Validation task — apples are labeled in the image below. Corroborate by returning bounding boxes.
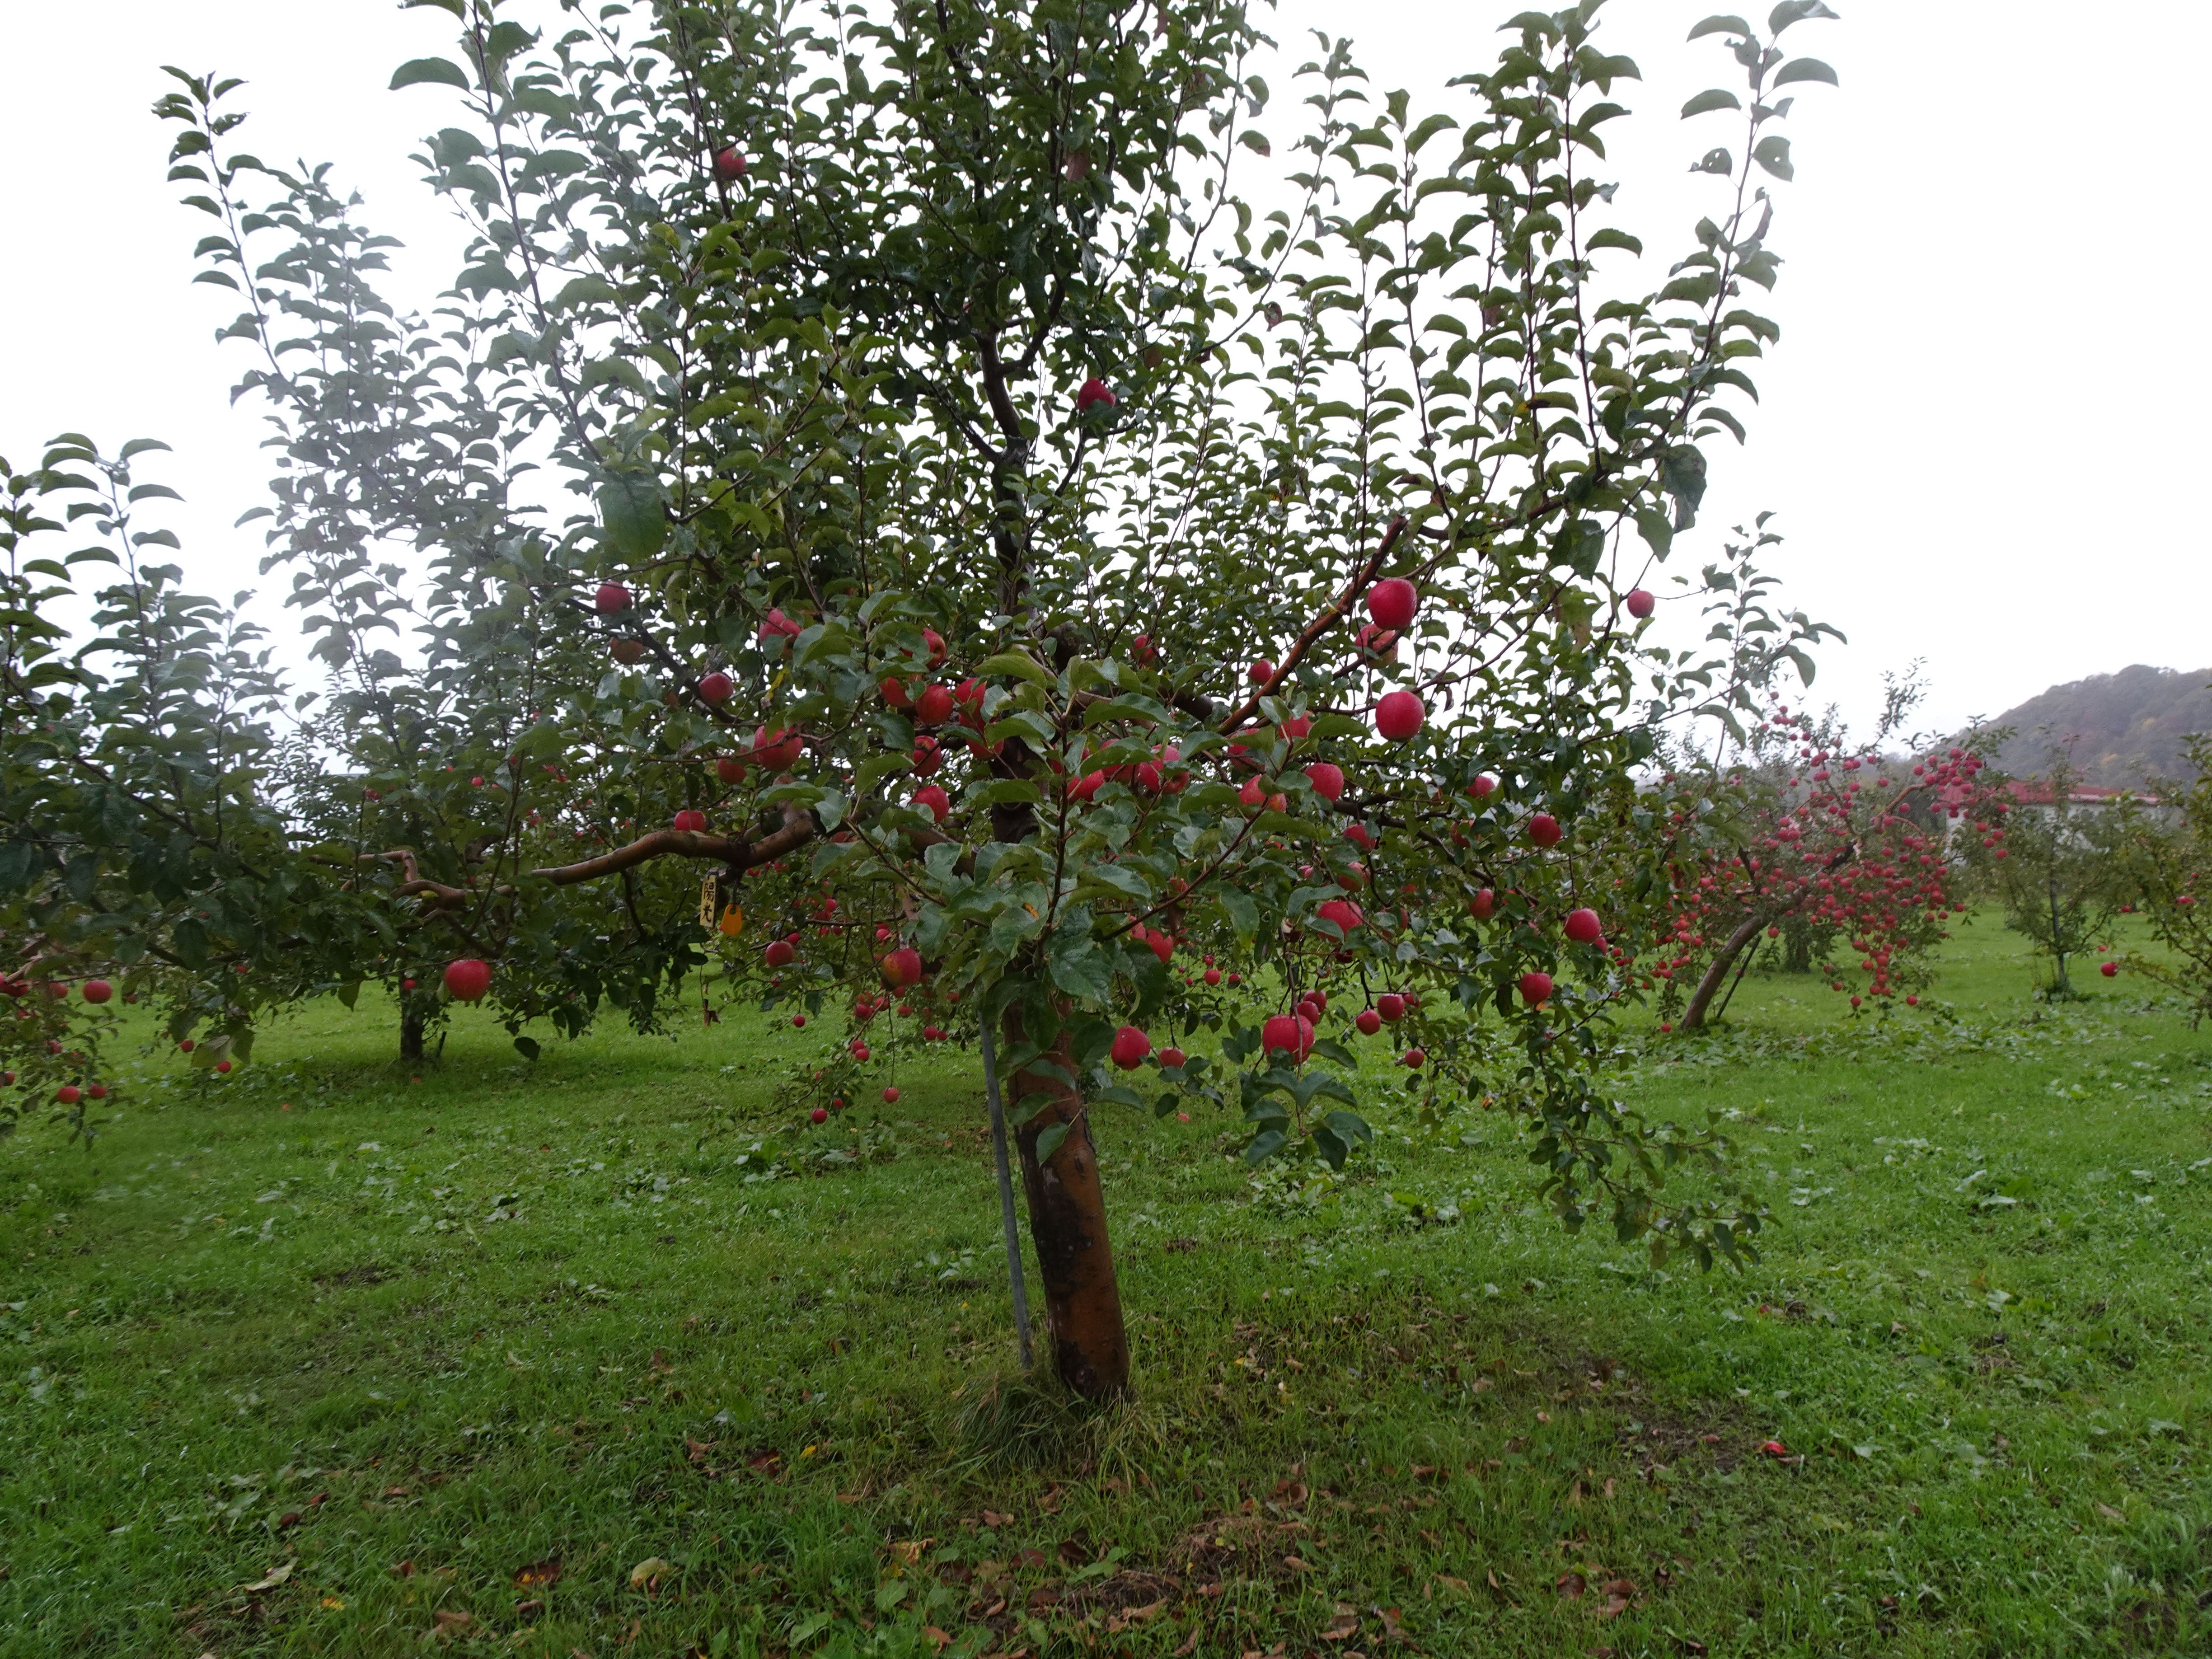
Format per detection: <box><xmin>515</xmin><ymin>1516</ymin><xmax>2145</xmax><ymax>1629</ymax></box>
<box><xmin>1565</xmin><ymin>908</ymin><xmax>1603</xmax><ymax>944</ymax></box>
<box><xmin>1626</xmin><ymin>588</ymin><xmax>1654</xmax><ymax>618</ymax></box>
<box><xmin>607</xmin><ymin>631</ymin><xmax>649</xmax><ymax>666</ymax></box>
<box><xmin>1098</xmin><ymin>732</ymin><xmax>1133</xmax><ymax>789</ymax></box>
<box><xmin>816</xmin><ymin>892</ymin><xmax>842</xmax><ymax>921</ymax></box>
<box><xmin>1139</xmin><ymin>925</ymin><xmax>1175</xmax><ymax>966</ymax></box>
<box><xmin>849</xmin><ymin>1039</ymin><xmax>867</xmax><ymax>1059</ymax></box>
<box><xmin>1467</xmin><ymin>883</ymin><xmax>1501</xmax><ymax>924</ymax></box>
<box><xmin>830</xmin><ymin>827</ymin><xmax>861</xmax><ymax>856</ymax></box>
<box><xmin>784</xmin><ymin>926</ymin><xmax>802</xmax><ymax>950</ymax></box>
<box><xmin>1113</xmin><ymin>851</ymin><xmax>1145</xmax><ymax>879</ymax></box>
<box><xmin>1246</xmin><ymin>655</ymin><xmax>1279</xmax><ymax>690</ymax></box>
<box><xmin>1527</xmin><ymin>812</ymin><xmax>1567</xmax><ymax>850</ymax></box>
<box><xmin>673</xmin><ymin>807</ymin><xmax>708</xmax><ymax>831</ymax></box>
<box><xmin>933</xmin><ymin>1029</ymin><xmax>954</xmax><ymax>1045</ymax></box>
<box><xmin>1200</xmin><ymin>950</ymin><xmax>1218</xmax><ymax>970</ymax></box>
<box><xmin>1177</xmin><ymin>1111</ymin><xmax>1191</xmax><ymax>1127</ymax></box>
<box><xmin>909</xmin><ymin>780</ymin><xmax>949</xmax><ymax>824</ymax></box>
<box><xmin>963</xmin><ymin>720</ymin><xmax>1006</xmax><ymax>764</ymax></box>
<box><xmin>444</xmin><ymin>956</ymin><xmax>494</xmax><ymax>1003</ymax></box>
<box><xmin>1293</xmin><ymin>998</ymin><xmax>1322</xmax><ymax>1030</ymax></box>
<box><xmin>1405</xmin><ymin>1047</ymin><xmax>1425</xmax><ymax>1071</ymax></box>
<box><xmin>773</xmin><ymin>856</ymin><xmax>792</xmax><ymax>876</ymax></box>
<box><xmin>851</xmin><ymin>986</ymin><xmax>874</xmax><ymax>1009</ymax></box>
<box><xmin>1353</xmin><ymin>1010</ymin><xmax>1381</xmax><ymax>1038</ymax></box>
<box><xmin>714</xmin><ymin>145</ymin><xmax>746</xmax><ymax>181</ymax></box>
<box><xmin>1202</xmin><ymin>967</ymin><xmax>1224</xmax><ymax>988</ymax></box>
<box><xmin>1331</xmin><ymin>860</ymin><xmax>1377</xmax><ymax>892</ymax></box>
<box><xmin>1340</xmin><ymin>820</ymin><xmax>1380</xmax><ymax>859</ymax></box>
<box><xmin>1401</xmin><ymin>876</ymin><xmax>1423</xmax><ymax>898</ymax></box>
<box><xmin>898</xmin><ymin>733</ymin><xmax>945</xmax><ymax>779</ymax></box>
<box><xmin>853</xmin><ymin>1049</ymin><xmax>869</xmax><ymax>1065</ymax></box>
<box><xmin>595</xmin><ymin>579</ymin><xmax>637</xmax><ymax>620</ymax></box>
<box><xmin>941</xmin><ymin>987</ymin><xmax>963</xmax><ymax>1007</ymax></box>
<box><xmin>1155</xmin><ymin>874</ymin><xmax>1192</xmax><ymax>907</ymax></box>
<box><xmin>1177</xmin><ymin>963</ymin><xmax>1191</xmax><ymax>977</ymax></box>
<box><xmin>1367</xmin><ymin>576</ymin><xmax>1419</xmax><ymax>633</ymax></box>
<box><xmin>1496</xmin><ymin>888</ymin><xmax>1523</xmax><ymax>915</ymax></box>
<box><xmin>760</xmin><ymin>915</ymin><xmax>777</xmax><ymax>935</ymax></box>
<box><xmin>1285</xmin><ymin>913</ymin><xmax>1303</xmax><ymax>929</ymax></box>
<box><xmin>1047</xmin><ymin>729</ymin><xmax>1092</xmax><ymax>780</ymax></box>
<box><xmin>879</xmin><ymin>946</ymin><xmax>926</xmax><ymax>992</ymax></box>
<box><xmin>1374</xmin><ymin>689</ymin><xmax>1427</xmax><ymax>747</ymax></box>
<box><xmin>809</xmin><ymin>1069</ymin><xmax>829</xmax><ymax>1084</ymax></box>
<box><xmin>808</xmin><ymin>1104</ymin><xmax>829</xmax><ymax>1128</ymax></box>
<box><xmin>837</xmin><ymin>579</ymin><xmax>856</xmax><ymax>604</ymax></box>
<box><xmin>1074</xmin><ymin>375</ymin><xmax>1120</xmax><ymax>424</ymax></box>
<box><xmin>1609</xmin><ymin>989</ymin><xmax>1622</xmax><ymax>999</ymax></box>
<box><xmin>832</xmin><ymin>1089</ymin><xmax>853</xmax><ymax>1109</ymax></box>
<box><xmin>1063</xmin><ymin>764</ymin><xmax>1108</xmax><ymax>808</ymax></box>
<box><xmin>829</xmin><ymin>922</ymin><xmax>845</xmax><ymax>936</ymax></box>
<box><xmin>789</xmin><ymin>1013</ymin><xmax>805</xmax><ymax>1028</ymax></box>
<box><xmin>1226</xmin><ymin>970</ymin><xmax>1247</xmax><ymax>990</ymax></box>
<box><xmin>715</xmin><ymin>744</ymin><xmax>751</xmax><ymax>787</ymax></box>
<box><xmin>1237</xmin><ymin>774</ymin><xmax>1290</xmax><ymax>824</ymax></box>
<box><xmin>752</xmin><ymin>722</ymin><xmax>805</xmax><ymax>773</ymax></box>
<box><xmin>1447</xmin><ymin>817</ymin><xmax>1498</xmax><ymax>849</ymax></box>
<box><xmin>1391</xmin><ymin>989</ymin><xmax>1418</xmax><ymax>1015</ymax></box>
<box><xmin>1376</xmin><ymin>991</ymin><xmax>1405</xmax><ymax>1022</ymax></box>
<box><xmin>1298</xmin><ymin>761</ymin><xmax>1346</xmax><ymax>809</ymax></box>
<box><xmin>1106</xmin><ymin>1024</ymin><xmax>1153</xmax><ymax>1074</ymax></box>
<box><xmin>1137</xmin><ymin>743</ymin><xmax>1192</xmax><ymax>796</ymax></box>
<box><xmin>913</xmin><ymin>682</ymin><xmax>955</xmax><ymax>727</ymax></box>
<box><xmin>1111</xmin><ymin>912</ymin><xmax>1152</xmax><ymax>951</ymax></box>
<box><xmin>1302</xmin><ymin>985</ymin><xmax>1332</xmax><ymax>1014</ymax></box>
<box><xmin>1291</xmin><ymin>861</ymin><xmax>1324</xmax><ymax>893</ymax></box>
<box><xmin>1127</xmin><ymin>632</ymin><xmax>1161</xmax><ymax>667</ymax></box>
<box><xmin>698</xmin><ymin>668</ymin><xmax>735</xmax><ymax>709</ymax></box>
<box><xmin>893</xmin><ymin>622</ymin><xmax>947</xmax><ymax>675</ymax></box>
<box><xmin>1275</xmin><ymin>707</ymin><xmax>1319</xmax><ymax>752</ymax></box>
<box><xmin>875</xmin><ymin>659</ymin><xmax>925</xmax><ymax>709</ymax></box>
<box><xmin>882</xmin><ymin>1082</ymin><xmax>902</xmax><ymax>1106</ymax></box>
<box><xmin>1517</xmin><ymin>971</ymin><xmax>1555</xmax><ymax>1007</ymax></box>
<box><xmin>1427</xmin><ymin>787</ymin><xmax>1470</xmax><ymax>822</ymax></box>
<box><xmin>1593</xmin><ymin>937</ymin><xmax>1607</xmax><ymax>953</ymax></box>
<box><xmin>1185</xmin><ymin>975</ymin><xmax>1199</xmax><ymax>992</ymax></box>
<box><xmin>1224</xmin><ymin>726</ymin><xmax>1273</xmax><ymax>778</ymax></box>
<box><xmin>755</xmin><ymin>600</ymin><xmax>819</xmax><ymax>664</ymax></box>
<box><xmin>1437</xmin><ymin>770</ymin><xmax>1494</xmax><ymax>814</ymax></box>
<box><xmin>804</xmin><ymin>910</ymin><xmax>824</xmax><ymax>930</ymax></box>
<box><xmin>814</xmin><ymin>924</ymin><xmax>834</xmax><ymax>942</ymax></box>
<box><xmin>1261</xmin><ymin>1011</ymin><xmax>1316</xmax><ymax>1069</ymax></box>
<box><xmin>792</xmin><ymin>891</ymin><xmax>815</xmax><ymax>911</ymax></box>
<box><xmin>1263</xmin><ymin>836</ymin><xmax>1283</xmax><ymax>853</ymax></box>
<box><xmin>853</xmin><ymin>1003</ymin><xmax>876</xmax><ymax>1021</ymax></box>
<box><xmin>1511</xmin><ymin>921</ymin><xmax>1541</xmax><ymax>956</ymax></box>
<box><xmin>1313</xmin><ymin>898</ymin><xmax>1367</xmax><ymax>950</ymax></box>
<box><xmin>1155</xmin><ymin>1046</ymin><xmax>1186</xmax><ymax>1076</ymax></box>
<box><xmin>896</xmin><ymin>1001</ymin><xmax>914</xmax><ymax>1021</ymax></box>
<box><xmin>917</xmin><ymin>1004</ymin><xmax>936</xmax><ymax>1022</ymax></box>
<box><xmin>744</xmin><ymin>863</ymin><xmax>765</xmax><ymax>880</ymax></box>
<box><xmin>924</xmin><ymin>1022</ymin><xmax>938</xmax><ymax>1042</ymax></box>
<box><xmin>953</xmin><ymin>670</ymin><xmax>1001</xmax><ymax>726</ymax></box>
<box><xmin>870</xmin><ymin>923</ymin><xmax>892</xmax><ymax>944</ymax></box>
<box><xmin>1354</xmin><ymin>622</ymin><xmax>1400</xmax><ymax>670</ymax></box>
<box><xmin>762</xmin><ymin>935</ymin><xmax>796</xmax><ymax>974</ymax></box>
<box><xmin>1372</xmin><ymin>902</ymin><xmax>1411</xmax><ymax>938</ymax></box>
